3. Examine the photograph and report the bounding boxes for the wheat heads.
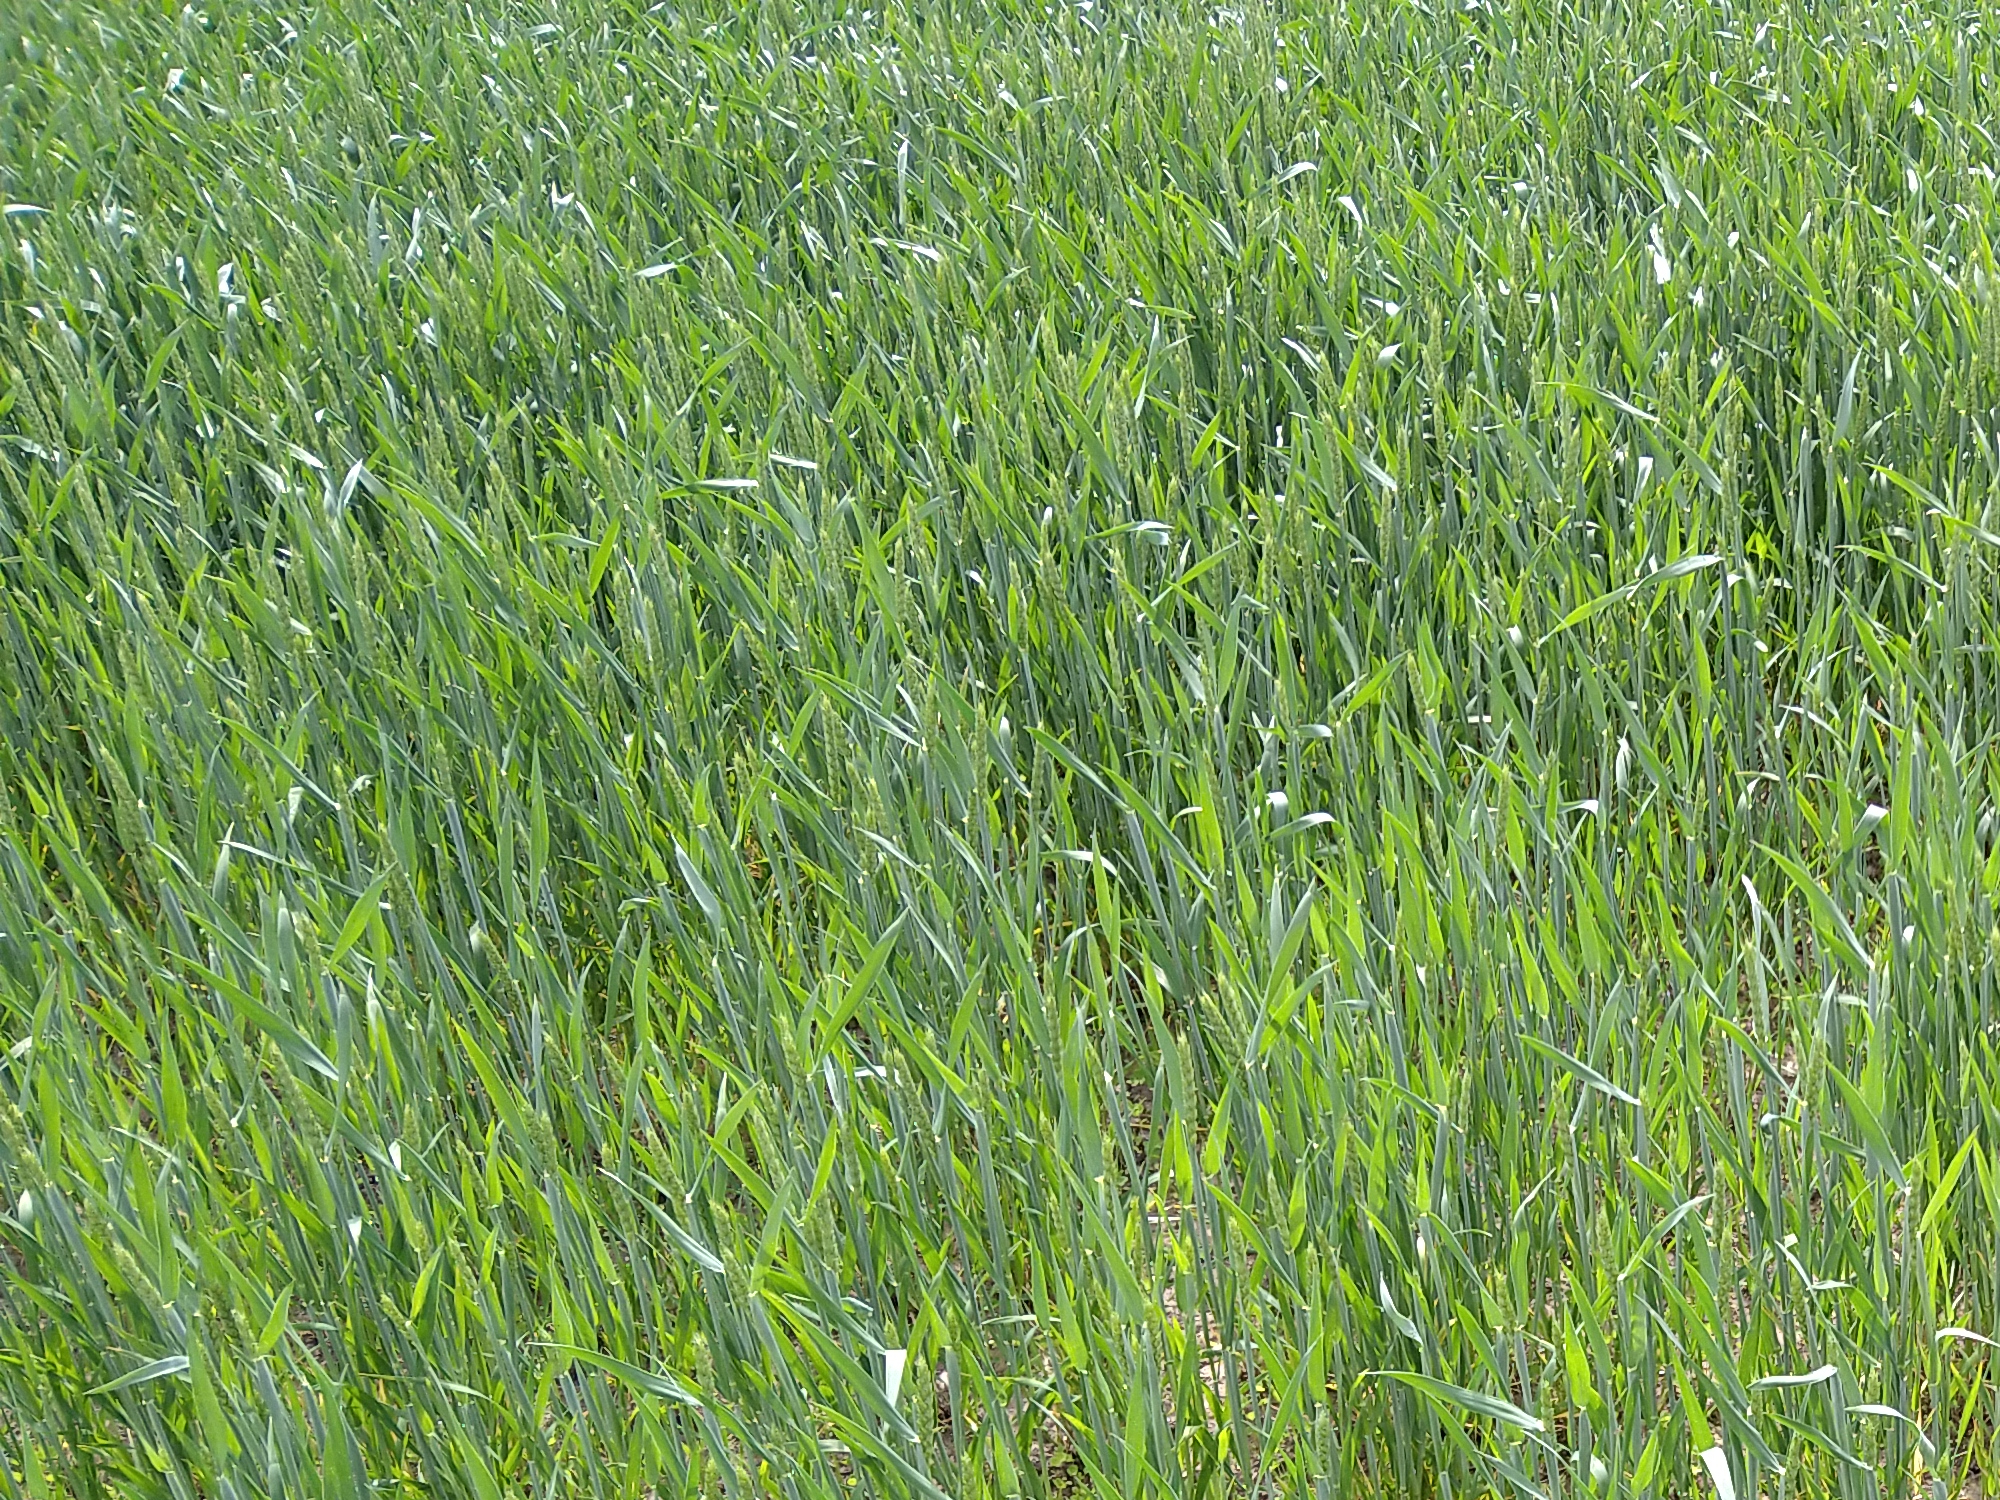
[1697,33,1703,74]
[315,641,360,719]
[326,325,340,378]
[539,1108,558,1176]
[613,574,632,671]
[39,219,67,277]
[1346,1127,1365,1204]
[648,1128,687,1206]
[137,594,184,680]
[1178,395,1192,477]
[643,596,661,677]
[425,391,443,462]
[442,82,470,163]
[470,227,492,285]
[1197,612,1209,669]
[1259,938,1275,972]
[1264,261,1278,341]
[829,584,841,640]
[1780,17,1789,83]
[1564,38,1575,72]
[1410,654,1426,726]
[1979,305,1995,375]
[1774,373,1786,441]
[681,1090,704,1157]
[242,632,264,710]
[1486,520,1495,574]
[1991,928,2000,994]
[1176,1030,1199,1144]
[831,494,840,518]
[287,123,303,187]
[0,1087,37,1190]
[1720,462,1733,534]
[351,541,370,609]
[1483,519,1494,582]
[1262,537,1273,601]
[1164,246,1171,280]
[1134,472,1149,519]
[904,658,921,713]
[88,366,117,453]
[230,365,239,400]
[737,1467,767,1500]
[1514,0,1522,38]
[1524,580,1540,645]
[525,580,538,655]
[694,1081,709,1126]
[1240,524,1252,594]
[694,1330,713,1391]
[8,366,55,460]
[1104,631,1121,695]
[1695,780,1705,831]
[197,1342,234,1415]
[167,728,186,781]
[101,748,153,882]
[1123,237,1141,298]
[1281,542,1296,578]
[926,436,942,504]
[450,271,470,343]
[295,252,321,310]
[1050,477,1067,533]
[1539,499,1549,546]
[1029,123,1041,193]
[1046,1188,1066,1248]
[571,260,586,312]
[1860,1362,1879,1422]
[1067,349,1078,399]
[1947,932,1954,996]
[1222,100,1233,134]
[1129,124,1140,167]
[863,806,877,872]
[1993,288,2000,380]
[734,340,766,405]
[1316,1227,1338,1285]
[1199,98,1220,153]
[1211,322,1221,379]
[1485,103,1497,144]
[1981,104,1991,140]
[741,624,775,680]
[117,804,139,855]
[1590,21,1595,67]
[785,302,823,401]
[1395,630,1407,678]
[385,858,403,906]
[1139,222,1157,267]
[290,951,329,1042]
[490,459,533,542]
[944,344,958,385]
[894,536,908,624]
[533,337,559,405]
[666,282,676,334]
[1792,1267,1813,1338]
[1934,794,1947,847]
[130,311,145,356]
[1513,234,1525,286]
[1530,156,1551,214]
[858,254,875,306]
[1809,1038,1826,1128]
[1189,245,1203,285]
[1658,787,1667,833]
[850,814,874,870]
[963,340,983,396]
[1753,141,1763,182]
[1020,411,1035,491]
[476,329,492,389]
[672,1198,687,1233]
[1459,1071,1471,1128]
[895,1051,932,1147]
[1964,905,1978,967]
[1318,1409,1330,1471]
[1178,38,1190,75]
[1355,377,1366,412]
[811,413,824,477]
[886,454,894,489]
[348,106,359,148]
[97,296,136,387]
[1434,400,1447,462]
[365,100,393,162]
[834,225,849,287]
[1046,551,1076,626]
[1297,141,1309,200]
[1375,167,1383,197]
[1111,389,1127,465]
[1349,396,1368,457]
[660,332,683,401]
[303,921,341,1019]
[1964,386,1972,415]
[220,581,232,616]
[1199,672,1216,710]
[348,1068,378,1149]
[1543,749,1555,802]
[37,241,74,284]
[1597,435,1614,494]
[117,637,154,717]
[159,440,190,529]
[1549,500,1561,528]
[846,761,872,816]
[1821,60,1830,113]
[1804,155,1808,218]
[1447,1067,1460,1124]
[923,670,938,743]
[1238,404,1246,484]
[1379,489,1393,566]
[292,634,315,699]
[808,189,817,229]
[1135,530,1149,564]
[1844,187,1850,224]
[70,885,89,938]
[1716,36,1728,69]
[356,601,380,672]
[325,1132,343,1173]
[382,526,397,574]
[262,95,275,134]
[1814,396,1829,455]
[0,262,24,325]
[1541,29,1546,74]
[882,1049,892,1092]
[597,154,606,197]
[292,364,323,446]
[976,708,991,804]
[285,381,303,439]
[436,742,452,798]
[452,401,470,458]
[1320,351,1337,406]
[1267,1171,1287,1247]
[1249,326,1260,366]
[524,1102,546,1165]
[1555,57,1563,104]
[1892,664,1903,728]
[1212,536,1226,608]
[493,541,513,601]
[428,221,448,301]
[917,1358,933,1452]
[1174,282,1189,313]
[172,346,190,385]
[759,1081,783,1147]
[904,274,924,329]
[1905,446,1911,467]
[1709,38,1717,71]
[1229,67,1242,102]
[602,664,625,743]
[1560,292,1575,369]
[910,77,927,125]
[1633,987,1646,1050]
[1307,1242,1316,1298]
[204,1084,234,1139]
[413,1018,427,1060]
[1569,117,1579,159]
[1187,3,1196,31]
[1634,95,1647,160]
[1532,666,1550,727]
[0,454,39,528]
[1469,888,1479,946]
[641,279,655,345]
[944,260,968,325]
[1393,620,1404,674]
[393,527,423,587]
[1334,246,1344,315]
[1757,329,1763,392]
[45,304,84,398]
[883,1321,899,1348]
[1113,505,1128,557]
[627,261,641,322]
[1799,357,1812,434]
[1518,570,1539,639]
[1264,93,1281,143]
[1120,109,1132,176]
[1514,290,1533,339]
[1101,1136,1112,1172]
[503,432,516,490]
[1425,956,1435,1014]
[1166,415,1178,475]
[1504,293,1516,347]
[1910,1156,1923,1266]
[346,253,365,303]
[1353,145,1362,180]
[1593,970,1603,1015]
[1057,355,1067,386]
[780,407,800,457]
[1964,254,1978,292]
[705,806,738,867]
[269,556,290,631]
[196,260,220,327]
[766,175,781,223]
[1227,1216,1251,1319]
[1166,481,1179,540]
[284,257,323,341]
[438,848,451,901]
[1685,154,1696,185]
[14,586,47,629]
[1143,1302,1163,1375]
[605,1051,627,1099]
[654,489,665,539]
[678,414,696,475]
[1141,104,1156,157]
[505,259,528,338]
[1509,443,1521,502]
[1439,227,1450,272]
[0,1115,52,1182]
[107,1241,170,1329]
[440,468,466,521]
[1419,100,1428,141]
[1948,882,1963,958]
[918,343,942,397]
[963,1458,980,1500]
[1296,515,1313,590]
[651,535,677,631]
[1552,0,1563,34]
[1562,439,1579,506]
[602,1150,635,1241]
[1094,1275,1112,1315]
[939,463,958,539]
[818,1195,838,1270]
[1221,160,1239,234]
[1595,1207,1613,1289]
[457,1143,489,1203]
[988,350,1007,410]
[1196,612,1214,669]
[200,1294,231,1362]
[1252,188,1259,231]
[1834,238,1844,277]
[1969,354,1978,412]
[1315,374,1326,420]
[1046,357,1050,381]
[866,779,895,834]
[779,228,791,291]
[1508,203,1521,238]
[1844,62,1861,121]
[704,1459,721,1500]
[1496,1272,1518,1343]
[1412,429,1422,505]
[1106,1312,1121,1347]
[1219,356,1231,415]
[1113,551,1136,624]
[609,366,630,434]
[1910,274,1926,306]
[799,481,806,514]
[380,1294,415,1385]
[1222,526,1238,578]
[926,84,943,127]
[1287,578,1299,610]
[349,65,369,143]
[1313,740,1342,791]
[1958,358,1966,379]
[1970,540,1984,630]
[1486,202,1498,251]
[72,210,106,298]
[1046,991,1060,1078]
[1941,545,1957,603]
[265,668,292,712]
[215,1290,244,1348]
[598,457,622,517]
[670,678,693,755]
[1931,512,1944,553]
[395,991,408,1036]
[1211,855,1229,934]
[367,304,387,357]
[387,221,405,278]
[1739,47,1747,84]
[0,775,15,832]
[712,1200,739,1252]
[906,591,925,653]
[1653,368,1672,432]
[863,480,870,506]
[1493,70,1504,107]
[820,699,843,803]
[1327,703,1346,767]
[1955,479,1967,520]
[478,932,522,1010]
[1047,328,1065,396]
[1218,976,1248,1055]
[1734,401,1745,443]
[1176,336,1191,408]
[1717,200,1725,241]
[1063,41,1074,88]
[299,235,318,278]
[880,1149,895,1193]
[968,790,980,859]
[969,496,986,546]
[732,755,757,825]
[1745,950,1762,1035]
[1355,1027,1368,1113]
[1029,743,1045,832]
[265,415,282,471]
[1628,122,1639,163]
[1311,206,1325,267]
[326,434,347,489]
[910,499,930,575]
[95,575,111,632]
[581,647,602,718]
[334,420,345,452]
[1340,714,1365,772]
[989,425,1002,512]
[1687,417,1696,482]
[714,263,752,355]
[1240,263,1249,324]
[1813,203,1821,243]
[1716,1228,1732,1331]
[323,374,344,428]
[156,589,177,639]
[1959,151,1971,206]
[746,744,764,783]
[1861,206,1872,269]
[1403,1173,1417,1202]
[1875,76,1888,138]
[151,203,177,250]
[1711,1014,1729,1094]
[1120,378,1137,445]
[99,628,121,685]
[1568,188,1586,260]
[1652,27,1662,84]
[47,326,73,388]
[1087,1045,1103,1089]
[403,1105,420,1181]
[1420,236,1429,290]
[1841,265,1860,321]
[1925,222,1931,258]
[1016,249,1040,326]
[2,300,34,372]
[1044,114,1057,173]
[1795,1037,1811,1102]
[628,772,653,830]
[1643,252,1658,332]
[758,443,769,499]
[1075,1240,1097,1284]
[1495,771,1511,857]
[643,347,674,414]
[1935,370,1955,435]
[1250,394,1259,445]
[935,267,944,326]
[1540,751,1557,787]
[635,631,654,688]
[1749,301,1761,339]
[786,390,813,459]
[1344,718,1355,787]
[1712,1166,1723,1239]
[595,70,613,121]
[244,1049,267,1136]
[1008,561,1026,607]
[1286,55,1298,99]
[1934,145,1943,193]
[1015,603,1026,644]
[719,1241,750,1314]
[371,82,392,137]
[1722,377,1739,448]
[991,323,1010,393]
[1887,309,1898,351]
[781,1030,816,1128]
[1086,145,1096,203]
[1042,319,1050,359]
[432,1090,445,1142]
[1688,354,1698,405]
[187,582,214,636]
[803,1214,819,1283]
[1811,238,1819,283]
[1203,749,1224,825]
[747,181,760,230]
[1320,413,1343,497]
[643,165,649,200]
[29,365,71,459]
[418,334,438,401]
[1396,428,1407,509]
[821,487,828,531]
[775,551,797,603]
[77,466,100,522]
[379,825,417,927]
[74,482,112,579]
[1429,310,1444,382]
[271,1049,324,1159]
[831,710,852,757]
[142,642,166,689]
[541,543,577,616]
[1485,838,1492,882]
[1876,290,1888,360]
[1201,991,1246,1091]
[177,318,212,397]
[97,478,117,551]
[268,166,293,206]
[1793,544,1808,599]
[1462,962,1477,1030]
[960,504,966,540]
[1276,681,1290,726]
[1855,387,1869,458]
[1420,346,1434,391]
[1531,356,1543,403]
[842,1129,859,1198]
[222,417,238,473]
[1254,110,1264,158]
[1788,33,1796,84]
[587,228,605,306]
[972,391,987,440]
[86,1206,117,1250]
[1035,574,1059,635]
[1619,70,1635,130]
[1562,130,1571,178]
[821,531,848,606]
[1990,484,2000,570]
[1034,390,1064,478]
[658,117,666,154]
[1949,168,1957,201]
[1554,164,1563,229]
[1578,108,1588,160]
[424,443,440,492]
[438,424,449,471]
[227,698,273,794]
[1522,40,1530,83]
[1255,484,1274,535]
[755,1115,795,1216]
[665,760,693,824]
[334,763,353,830]
[1426,817,1446,873]
[546,1036,572,1091]
[176,529,197,570]
[1554,1087,1570,1151]
[1887,435,1900,465]
[470,631,491,702]
[1615,30,1620,65]
[1153,82,1161,108]
[254,238,274,299]
[1472,958,1480,987]
[450,1238,476,1295]
[442,168,463,225]
[71,525,102,588]
[610,448,644,520]
[1769,272,1778,314]
[1467,120,1480,153]
[515,135,532,200]
[568,524,590,601]
[745,911,776,964]
[0,218,17,256]
[1487,952,1496,990]
[487,484,507,542]
[520,277,543,324]
[246,544,259,575]
[789,598,813,680]
[290,546,317,629]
